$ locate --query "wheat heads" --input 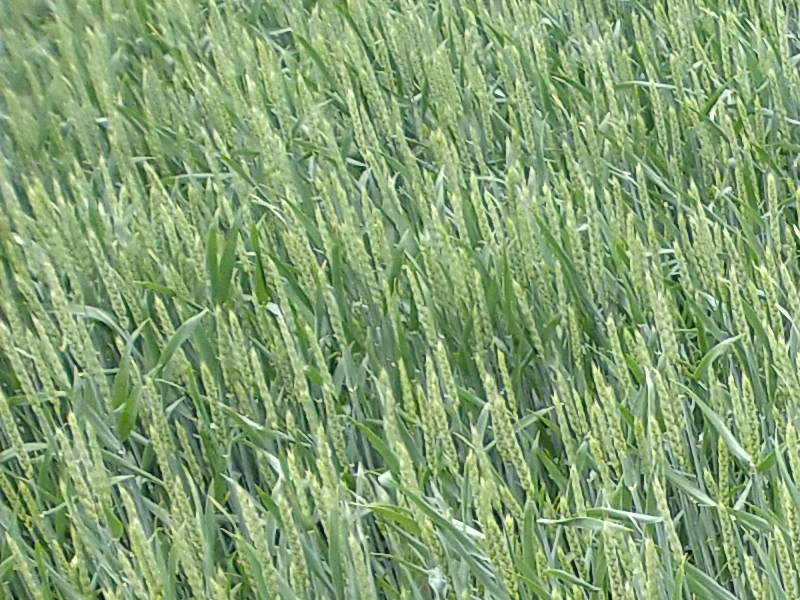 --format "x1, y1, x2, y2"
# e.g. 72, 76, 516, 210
323, 121, 355, 198
145, 108, 162, 153
260, 241, 274, 292
99, 156, 116, 205
488, 515, 516, 592
516, 199, 536, 279
691, 31, 712, 93
591, 439, 606, 474
688, 190, 696, 200
284, 52, 296, 75
604, 20, 617, 51
477, 0, 488, 29
395, 124, 411, 172
440, 225, 474, 311
77, 315, 113, 403
777, 334, 800, 406
341, 225, 355, 261
127, 172, 154, 245
706, 7, 714, 29
584, 388, 594, 421
271, 344, 277, 352
725, 115, 743, 169
545, 121, 556, 158
657, 1, 679, 55
720, 137, 730, 166
172, 76, 195, 129
724, 227, 753, 304
538, 277, 552, 318
793, 186, 800, 268
792, 68, 800, 138
127, 524, 155, 594
635, 232, 650, 272
653, 369, 682, 466
592, 365, 606, 405
1, 297, 26, 349
234, 534, 257, 591
257, 453, 277, 488
111, 268, 144, 332
612, 177, 626, 238
321, 385, 347, 465
742, 136, 760, 204
469, 126, 488, 176
553, 394, 577, 465
275, 2, 286, 25
667, 0, 679, 28
176, 205, 205, 281
349, 534, 376, 600
570, 115, 584, 155
440, 46, 464, 114
409, 152, 424, 188
322, 9, 344, 74
446, 218, 454, 236
56, 429, 96, 523
237, 488, 255, 539
586, 115, 603, 175
645, 537, 662, 600
636, 165, 654, 232
399, 0, 412, 26
147, 318, 167, 353
4, 89, 33, 138
640, 15, 660, 71
376, 1, 401, 68
615, 45, 625, 84
351, 317, 366, 344
435, 400, 458, 472
22, 60, 41, 91
509, 218, 527, 286
308, 6, 319, 34
345, 20, 362, 67
559, 10, 567, 36
28, 217, 44, 245
670, 105, 682, 162
170, 500, 181, 523
41, 149, 54, 173
85, 60, 110, 114
177, 126, 192, 163
452, 194, 469, 246
717, 378, 724, 408
150, 426, 177, 500
717, 502, 738, 572
689, 176, 720, 270
136, 394, 150, 429
276, 82, 294, 147
677, 9, 690, 60
685, 96, 711, 158
379, 369, 392, 393
507, 167, 520, 184
68, 173, 89, 215
270, 261, 294, 331
659, 293, 679, 355
214, 307, 235, 377
484, 188, 503, 243
338, 187, 364, 265
409, 0, 417, 12
564, 202, 579, 230
548, 0, 558, 19
236, 48, 250, 69
0, 261, 14, 302
361, 189, 380, 252
419, 195, 431, 227
200, 128, 219, 168
497, 51, 513, 96
21, 173, 47, 215
762, 574, 773, 600
417, 384, 438, 472
585, 0, 594, 23
392, 94, 402, 127
0, 322, 40, 415
708, 363, 717, 409
278, 495, 309, 585
314, 207, 334, 259
373, 208, 383, 221
775, 477, 785, 511
469, 26, 487, 66
402, 24, 414, 53
760, 267, 783, 334
364, 55, 388, 118
477, 66, 492, 112
703, 147, 714, 198
571, 583, 585, 600
459, 0, 467, 15
351, 1, 373, 47
299, 43, 308, 62
87, 28, 112, 81
501, 0, 512, 29
441, 0, 451, 33
472, 426, 500, 512
673, 243, 693, 293
510, 0, 533, 64
475, 498, 500, 573
394, 489, 411, 521
357, 238, 383, 309
230, 312, 251, 384
347, 90, 366, 146
776, 7, 792, 79
604, 32, 616, 66
305, 325, 339, 398
226, 71, 253, 121
422, 308, 436, 348
610, 217, 620, 236
46, 115, 64, 146
90, 195, 108, 242
205, 24, 225, 84
596, 42, 622, 147
109, 135, 128, 181
0, 207, 22, 263
473, 306, 484, 359
6, 240, 23, 278
175, 62, 186, 81
120, 253, 138, 292
182, 43, 201, 83
72, 64, 96, 129
602, 521, 626, 600
119, 185, 128, 216
698, 1, 707, 28
339, 480, 354, 509
746, 0, 755, 21
26, 329, 60, 403
780, 262, 800, 349
210, 81, 233, 136
717, 274, 728, 301
429, 28, 440, 64
559, 47, 586, 110
51, 293, 86, 367
51, 227, 79, 287
387, 395, 400, 440
527, 218, 544, 262
755, 15, 765, 59
620, 36, 628, 52
101, 80, 121, 132
66, 206, 94, 273
784, 480, 800, 580
717, 437, 728, 507
595, 0, 606, 33
557, 372, 580, 435
391, 29, 409, 79
569, 0, 576, 31
169, 102, 180, 125
290, 564, 311, 600
646, 273, 671, 351
8, 537, 46, 600
382, 278, 397, 326
24, 216, 49, 251
767, 46, 777, 69
497, 351, 515, 410
160, 204, 178, 253
505, 175, 515, 215
567, 465, 586, 518
451, 141, 467, 190
411, 52, 424, 83
478, 89, 493, 139
418, 2, 429, 24
718, 101, 727, 131
547, 163, 562, 193
516, 159, 526, 190
53, 66, 74, 103
121, 112, 137, 136
232, 381, 251, 413
431, 204, 445, 244
626, 212, 643, 287
66, 411, 98, 490
377, 219, 394, 276
53, 539, 76, 586
529, 1, 547, 69
387, 175, 402, 215
292, 236, 315, 295
74, 161, 97, 210
541, 259, 556, 301
650, 478, 682, 560
305, 469, 329, 531
409, 13, 427, 63
116, 549, 172, 600
175, 275, 192, 303
423, 522, 455, 600
624, 331, 651, 370
635, 329, 649, 363
590, 78, 603, 109
0, 394, 33, 476
150, 186, 162, 252
694, 294, 703, 311
490, 0, 500, 25
455, 14, 464, 32
56, 14, 75, 62
175, 475, 206, 559
315, 178, 337, 222
32, 316, 71, 385
200, 362, 225, 443
633, 418, 650, 474
287, 453, 309, 514
387, 12, 394, 27
784, 423, 800, 510
630, 12, 642, 47
251, 503, 280, 600
450, 20, 466, 61
515, 79, 536, 154
151, 64, 169, 118
241, 159, 257, 195
157, 6, 174, 45
647, 61, 670, 120
430, 131, 446, 175
735, 169, 749, 214
361, 105, 381, 159
425, 355, 436, 407
623, 49, 640, 108
87, 115, 103, 150
767, 69, 792, 142
543, 186, 562, 250
465, 29, 476, 65
142, 160, 177, 221
785, 227, 798, 267
560, 496, 589, 582
257, 39, 278, 98
200, 84, 214, 104
714, 167, 727, 224
670, 54, 690, 123
0, 171, 39, 276
51, 178, 67, 208
252, 107, 280, 179
347, 0, 356, 21
318, 461, 329, 485
153, 296, 192, 386
629, 534, 649, 600
83, 419, 113, 506
508, 105, 522, 159
209, 1, 233, 55
368, 6, 378, 27
365, 149, 388, 200
621, 120, 633, 149
145, 138, 171, 176
754, 96, 766, 142
326, 3, 344, 36
549, 83, 563, 127
568, 307, 585, 368
584, 187, 609, 298
119, 487, 138, 523
272, 326, 293, 394
649, 77, 667, 144
383, 416, 395, 449
563, 142, 580, 191
398, 443, 421, 494
691, 95, 716, 158
216, 569, 229, 586
437, 128, 462, 202
647, 227, 661, 270
0, 467, 25, 523
535, 550, 547, 581
719, 15, 733, 82
419, 232, 443, 309
202, 455, 213, 478
206, 153, 222, 188
565, 220, 589, 293
493, 395, 532, 491
595, 401, 619, 473
224, 0, 241, 45
556, 546, 574, 580
736, 227, 748, 267
422, 166, 438, 206
446, 106, 473, 172
728, 374, 747, 443
573, 390, 588, 432
244, 30, 262, 81
358, 69, 391, 139
251, 348, 278, 427
729, 267, 750, 341
253, 291, 271, 344
20, 482, 49, 541
188, 185, 205, 239
260, 112, 273, 138
116, 337, 140, 382
683, 0, 695, 33
163, 264, 176, 295
653, 263, 664, 289
573, 10, 589, 67
692, 71, 706, 108
315, 424, 337, 485
9, 119, 27, 150
398, 358, 417, 427
637, 40, 649, 69
318, 35, 340, 89
605, 318, 631, 391
176, 426, 202, 484
512, 45, 535, 114
375, 28, 396, 92
133, 516, 164, 587
652, 415, 663, 494
471, 170, 498, 255
454, 286, 480, 353
500, 13, 506, 33
476, 352, 488, 384
512, 280, 544, 353
701, 70, 712, 92
318, 271, 345, 343
114, 112, 133, 154
70, 527, 94, 600
704, 468, 717, 500
88, 230, 128, 324
127, 0, 145, 34
422, 52, 443, 107
474, 268, 493, 347
341, 62, 353, 94
95, 503, 109, 525
470, 455, 478, 492
749, 279, 762, 317
69, 100, 93, 158
279, 198, 310, 262
714, 222, 721, 252
771, 406, 784, 439
281, 231, 310, 296
431, 248, 452, 306
724, 10, 751, 104
743, 553, 776, 600
604, 189, 614, 216
767, 325, 777, 355
362, 208, 384, 276
690, 215, 714, 289
56, 38, 64, 57
677, 214, 708, 292
532, 195, 541, 216
559, 171, 572, 203
222, 196, 252, 269
794, 352, 800, 439
297, 75, 318, 139
35, 178, 51, 205
697, 43, 722, 89
604, 389, 626, 452
213, 129, 230, 161
738, 99, 754, 144
762, 243, 778, 277
460, 250, 479, 304
15, 278, 57, 332
274, 135, 299, 201
760, 0, 780, 54
500, 485, 539, 543
27, 32, 59, 69
613, 531, 634, 577
412, 180, 421, 204
556, 260, 568, 328
68, 556, 78, 585
438, 341, 461, 409
774, 524, 799, 600
405, 266, 425, 323
535, 40, 548, 80
173, 527, 207, 600
287, 13, 299, 47
94, 25, 110, 57
671, 155, 682, 193
764, 173, 780, 250
260, 227, 267, 252
652, 6, 666, 33
60, 480, 94, 556
286, 411, 295, 439
743, 376, 761, 463
414, 109, 423, 136
485, 26, 503, 49
484, 371, 501, 424
544, 495, 557, 539
44, 262, 76, 330
142, 59, 152, 106
175, 0, 195, 38
362, 472, 387, 534
382, 154, 389, 178
147, 377, 163, 437
292, 7, 307, 40
162, 416, 175, 451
